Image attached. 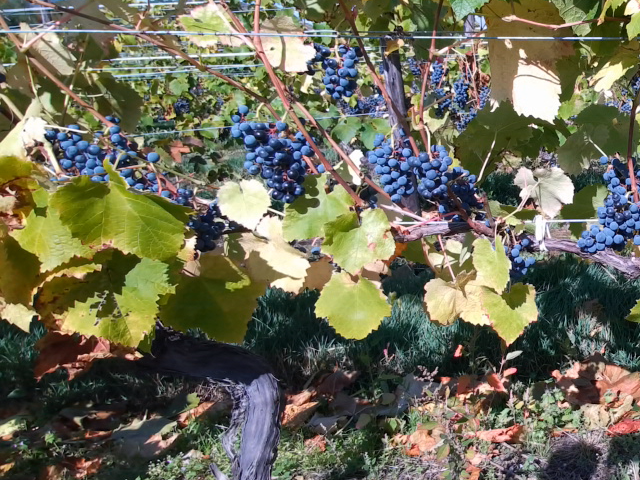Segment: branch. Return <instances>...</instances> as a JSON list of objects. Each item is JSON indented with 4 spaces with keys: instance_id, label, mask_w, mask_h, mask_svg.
<instances>
[{
    "instance_id": "2b1400db",
    "label": "branch",
    "mask_w": 640,
    "mask_h": 480,
    "mask_svg": "<svg viewBox=\"0 0 640 480\" xmlns=\"http://www.w3.org/2000/svg\"><path fill=\"white\" fill-rule=\"evenodd\" d=\"M444 0H438L437 3V10H436V16L433 19L432 22V27H431V34L432 35H437L436 29H437V25H438V21L441 18V13H442V6H443Z\"/></svg>"
},
{
    "instance_id": "30e6481e",
    "label": "branch",
    "mask_w": 640,
    "mask_h": 480,
    "mask_svg": "<svg viewBox=\"0 0 640 480\" xmlns=\"http://www.w3.org/2000/svg\"><path fill=\"white\" fill-rule=\"evenodd\" d=\"M246 40L248 43H250L251 46H253L254 48L257 49V53L256 56L258 57V59L262 62V64L264 65V67L267 70V73L270 75V78L276 88V91L278 93L280 102L282 104V107L284 109V111L289 115L291 121L293 124H296L300 130V132L302 133L305 141L307 142V144L309 145V147L312 149V151L315 153V155L319 158L320 162L322 163V165L327 169V171L332 175V177L334 178V180L342 185L346 191L348 192L349 196L358 204L361 205L362 204V200L354 193V191L352 190V188L349 186L348 183H346L343 178L336 172L334 171V169L329 165V163L325 160V158L323 157V154L319 151V149L316 147V145L314 144V142L311 140L310 136L308 135L307 131L305 130L302 122L300 121V119L297 117V115L294 113L293 111V106L291 105V103L289 102L288 98L293 102V104L296 106V108L301 111L302 113H304L306 115V117L310 120V122L312 123V125L314 126V128L326 139L330 142V144L333 146V148L338 152V154L340 155L341 159L347 163L349 166L352 167V170L354 171V173L357 175V177L359 179H361V181L365 184H367L370 187H373L376 191H378L383 197H385L388 201L392 200V196L386 192L384 189H382L380 186H378L377 184H375L373 181L369 180L368 178H366L361 171L357 168V164L350 160L346 154L344 153V151L342 150V148L337 144V142L333 139L332 136H330L316 121V119L314 118V116L306 109L304 108L298 101L297 98H295V96L288 90V88L284 85V82L278 78L275 74V72L273 71L271 65L269 64V62L267 61L265 54L263 52V48L261 46V38L260 37H246Z\"/></svg>"
},
{
    "instance_id": "8bde2521",
    "label": "branch",
    "mask_w": 640,
    "mask_h": 480,
    "mask_svg": "<svg viewBox=\"0 0 640 480\" xmlns=\"http://www.w3.org/2000/svg\"><path fill=\"white\" fill-rule=\"evenodd\" d=\"M302 159L306 162V164L309 166V168L311 169V171L313 172V174L315 176L319 175V171L317 170L316 166L313 164V162L310 160V158L307 155H303Z\"/></svg>"
},
{
    "instance_id": "1ff4a987",
    "label": "branch",
    "mask_w": 640,
    "mask_h": 480,
    "mask_svg": "<svg viewBox=\"0 0 640 480\" xmlns=\"http://www.w3.org/2000/svg\"><path fill=\"white\" fill-rule=\"evenodd\" d=\"M435 50H436V40H433V41H431V48H430V51L428 53L426 65L424 67L423 74H422L421 98H420V103H419V108H418V123H419L418 135L422 137V140H423V143H424V147H425V151H429V148H428V144H427V140H426L427 132L425 131V120L423 119V110H424V105H425V100H426V82H427V77H428V73H429V70H430V67H431V63H432V59H433Z\"/></svg>"
},
{
    "instance_id": "1af6ec82",
    "label": "branch",
    "mask_w": 640,
    "mask_h": 480,
    "mask_svg": "<svg viewBox=\"0 0 640 480\" xmlns=\"http://www.w3.org/2000/svg\"><path fill=\"white\" fill-rule=\"evenodd\" d=\"M340 8L342 9V11L346 14V16L348 17L350 24H351V28H352V32L353 34H359L357 26H356V22H355V18L353 16V14L349 11V9L345 6L344 2H340L339 3Z\"/></svg>"
},
{
    "instance_id": "982ccf7c",
    "label": "branch",
    "mask_w": 640,
    "mask_h": 480,
    "mask_svg": "<svg viewBox=\"0 0 640 480\" xmlns=\"http://www.w3.org/2000/svg\"><path fill=\"white\" fill-rule=\"evenodd\" d=\"M32 3L34 5H39V6H43L46 8H51L57 11H60L62 13H66L69 15H74L77 17H82V18H86V19H90V20H95L105 26L108 27H112V28H116L118 30H132V27L130 25L115 21V20H110L107 19L103 16H101L100 14L97 13H92V12H88V11H84V10H79L77 8H71L62 4H59L57 2L54 1H48V0H32Z\"/></svg>"
},
{
    "instance_id": "ca6c30ca",
    "label": "branch",
    "mask_w": 640,
    "mask_h": 480,
    "mask_svg": "<svg viewBox=\"0 0 640 480\" xmlns=\"http://www.w3.org/2000/svg\"><path fill=\"white\" fill-rule=\"evenodd\" d=\"M220 4L223 10L228 14V16L234 21V23L238 26L240 32H247V29L244 28L242 22L235 16V14L231 11L224 0L220 1Z\"/></svg>"
},
{
    "instance_id": "45aa463d",
    "label": "branch",
    "mask_w": 640,
    "mask_h": 480,
    "mask_svg": "<svg viewBox=\"0 0 640 480\" xmlns=\"http://www.w3.org/2000/svg\"><path fill=\"white\" fill-rule=\"evenodd\" d=\"M356 43H357L358 49L360 50V52L364 55V57L366 59V65L368 67V71H369V74H370L371 78L374 80L375 83H377V85L381 89V92L385 96V99L389 103V106L391 107V109L396 114L397 118L399 119L402 127L404 128V131L406 133L408 141L410 142V144L412 146L414 156L418 157L419 156V150H418L417 144H416V142H415V140L413 138V135H412L411 131L408 129V125H407V123H406V121L404 119V116L401 114V112L399 111V109L395 105L394 101L392 100V98H391L390 94L388 93V90L386 89V87L383 84V82L380 81V79L375 74V71L373 69V65L371 63V56L369 55V53L363 47L362 40L361 39H356Z\"/></svg>"
},
{
    "instance_id": "1d269e1b",
    "label": "branch",
    "mask_w": 640,
    "mask_h": 480,
    "mask_svg": "<svg viewBox=\"0 0 640 480\" xmlns=\"http://www.w3.org/2000/svg\"><path fill=\"white\" fill-rule=\"evenodd\" d=\"M447 190H448V193H449V198L451 200L455 201V204H456L457 208L459 209V211H460L461 215L463 216V218L466 220L467 224H469L470 226H473V223H472L471 219L468 218L466 213L463 211V208L461 207V205H460V203L458 201V198L455 197V195L452 193L450 185H447Z\"/></svg>"
},
{
    "instance_id": "170604dd",
    "label": "branch",
    "mask_w": 640,
    "mask_h": 480,
    "mask_svg": "<svg viewBox=\"0 0 640 480\" xmlns=\"http://www.w3.org/2000/svg\"><path fill=\"white\" fill-rule=\"evenodd\" d=\"M6 37L13 43H15L16 45L19 46V48L22 50V52L24 53L25 57L30 61V63L37 68L38 70L42 71V74L50 79L51 81L54 82V84L63 92L65 93L69 98H71L74 102H76L78 105H80L81 107H83L85 110H87L101 125L105 126L106 128H110L112 126V123L107 120L106 118H104L91 104H89L88 102H86L85 100H83L82 98H80L76 93H74L70 88H68L67 86H65V84L59 79V77L57 75H55L53 72L49 71V68L39 62L34 55L31 53L30 49L28 48V46L17 36H15L14 34H6Z\"/></svg>"
},
{
    "instance_id": "ea751061",
    "label": "branch",
    "mask_w": 640,
    "mask_h": 480,
    "mask_svg": "<svg viewBox=\"0 0 640 480\" xmlns=\"http://www.w3.org/2000/svg\"><path fill=\"white\" fill-rule=\"evenodd\" d=\"M639 102H640V90H638L637 97L634 100L633 107L631 109L630 131H629V142H628V170H629V177L631 182V194L633 196L634 203L639 202V194L637 193V190H636V177L634 174L633 163H632V137H633V129L635 125V109L636 107H638Z\"/></svg>"
},
{
    "instance_id": "325d2c04",
    "label": "branch",
    "mask_w": 640,
    "mask_h": 480,
    "mask_svg": "<svg viewBox=\"0 0 640 480\" xmlns=\"http://www.w3.org/2000/svg\"><path fill=\"white\" fill-rule=\"evenodd\" d=\"M140 38L148 43H151L152 45H155L157 47H160L162 49H164L165 51L169 52L172 55H175L176 57H178L181 60L187 61L188 63H191L192 65H194L195 68L201 69L202 71H206V72H210L212 75L216 76L217 78L222 79L225 82H228L232 85H234L235 88L249 94L250 96H252L254 99L259 100L260 102L264 103V106L270 110L274 116V118L276 120H280L281 116L279 115L277 109L272 106L268 100L265 97H262L261 95L256 94L253 90H251L250 88L246 87L245 85H243L240 81L234 80L231 77H228L222 73H220L219 71L215 70L212 67H208L205 65H202L199 63V60L197 58H195L194 56H191L189 54L183 53L181 50L171 46L170 44L154 38L153 36L150 35H140Z\"/></svg>"
}]
</instances>
